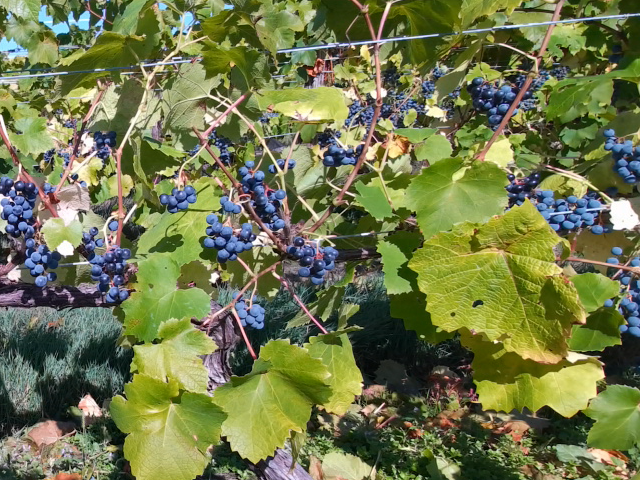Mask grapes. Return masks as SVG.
<instances>
[{
	"label": "grapes",
	"mask_w": 640,
	"mask_h": 480,
	"mask_svg": "<svg viewBox=\"0 0 640 480\" xmlns=\"http://www.w3.org/2000/svg\"><path fill=\"white\" fill-rule=\"evenodd\" d=\"M254 168V161H246L245 166L238 168V173L242 176L240 184L243 187V191L245 193L252 191L256 194L255 200H250L249 203L269 228L274 232L283 230L286 227V223L283 219H280L277 209L279 208V200L286 198V192L281 189H276L273 192L268 190L267 195H265L263 181L266 180V172L264 170H256L254 175L249 173Z\"/></svg>",
	"instance_id": "3"
},
{
	"label": "grapes",
	"mask_w": 640,
	"mask_h": 480,
	"mask_svg": "<svg viewBox=\"0 0 640 480\" xmlns=\"http://www.w3.org/2000/svg\"><path fill=\"white\" fill-rule=\"evenodd\" d=\"M602 135L607 138L603 149L611 151V156L616 161L613 171L618 173L627 185H635L640 181V146L635 145L631 139L618 143L613 128H605Z\"/></svg>",
	"instance_id": "8"
},
{
	"label": "grapes",
	"mask_w": 640,
	"mask_h": 480,
	"mask_svg": "<svg viewBox=\"0 0 640 480\" xmlns=\"http://www.w3.org/2000/svg\"><path fill=\"white\" fill-rule=\"evenodd\" d=\"M467 91L472 94L473 107L487 112L486 123L491 126V130L494 132L507 110L512 106L519 89L517 87L512 89L508 83H503L497 89L492 83L484 82L482 76H476L471 80Z\"/></svg>",
	"instance_id": "6"
},
{
	"label": "grapes",
	"mask_w": 640,
	"mask_h": 480,
	"mask_svg": "<svg viewBox=\"0 0 640 480\" xmlns=\"http://www.w3.org/2000/svg\"><path fill=\"white\" fill-rule=\"evenodd\" d=\"M509 184L505 186V190L509 193L508 205L513 207L515 205L521 206L526 198L532 196L539 202L536 205V209L541 212L545 217V220L550 224L554 231L572 230L576 227L592 226L590 232L594 235H603L604 233H610L612 226L610 224H595V219L599 216V212L585 213L584 209L593 206H603L605 201L599 199V194L588 189L586 194L580 199L575 195H570L567 199L562 198L557 201L555 193L552 190H540L537 189L532 193V187L540 181V175L537 172H532L530 175H525L523 181L519 185L516 184V176L509 174L507 176ZM576 203L574 213L571 215H559L550 216V211L557 210H569L571 209L569 204Z\"/></svg>",
	"instance_id": "2"
},
{
	"label": "grapes",
	"mask_w": 640,
	"mask_h": 480,
	"mask_svg": "<svg viewBox=\"0 0 640 480\" xmlns=\"http://www.w3.org/2000/svg\"><path fill=\"white\" fill-rule=\"evenodd\" d=\"M246 309L247 303L243 299H240L234 307L241 325L246 327L250 324L251 327L257 330L263 329L265 327L266 310L261 305H252L248 311Z\"/></svg>",
	"instance_id": "12"
},
{
	"label": "grapes",
	"mask_w": 640,
	"mask_h": 480,
	"mask_svg": "<svg viewBox=\"0 0 640 480\" xmlns=\"http://www.w3.org/2000/svg\"><path fill=\"white\" fill-rule=\"evenodd\" d=\"M116 132L108 131L107 134H102L100 131L94 133V139L96 143V149L101 150L104 145L114 147L116 145Z\"/></svg>",
	"instance_id": "14"
},
{
	"label": "grapes",
	"mask_w": 640,
	"mask_h": 480,
	"mask_svg": "<svg viewBox=\"0 0 640 480\" xmlns=\"http://www.w3.org/2000/svg\"><path fill=\"white\" fill-rule=\"evenodd\" d=\"M617 279L624 286L630 283L629 291L632 297V299L624 297L619 302V313L624 315V319L628 322V324H621L619 331L622 334H629L635 339H640V280L638 278L631 280V277L627 275L625 270L619 273Z\"/></svg>",
	"instance_id": "9"
},
{
	"label": "grapes",
	"mask_w": 640,
	"mask_h": 480,
	"mask_svg": "<svg viewBox=\"0 0 640 480\" xmlns=\"http://www.w3.org/2000/svg\"><path fill=\"white\" fill-rule=\"evenodd\" d=\"M38 186L24 181H16L8 176L0 177V194L5 199L0 201L3 210L0 212V218L7 221L4 226V232L10 234L12 238H18L22 232L24 234L25 256L24 265L26 269H30V276L35 277L34 284L37 287H44L47 282L56 281L58 275L54 271H49L47 275H43L48 268L54 270L57 268L62 256L58 251H48L45 244L39 245L36 249V241L33 237L35 234V220L33 218V210L35 202L38 198Z\"/></svg>",
	"instance_id": "1"
},
{
	"label": "grapes",
	"mask_w": 640,
	"mask_h": 480,
	"mask_svg": "<svg viewBox=\"0 0 640 480\" xmlns=\"http://www.w3.org/2000/svg\"><path fill=\"white\" fill-rule=\"evenodd\" d=\"M611 254L615 257H608L605 261L610 263H620V260L617 257H620L624 254V250L621 247H613L611 249Z\"/></svg>",
	"instance_id": "16"
},
{
	"label": "grapes",
	"mask_w": 640,
	"mask_h": 480,
	"mask_svg": "<svg viewBox=\"0 0 640 480\" xmlns=\"http://www.w3.org/2000/svg\"><path fill=\"white\" fill-rule=\"evenodd\" d=\"M206 223L209 226L205 230L207 237L204 239V247L207 249L216 248L218 250L216 258L219 262L235 261L237 253L251 250L252 242L257 239L254 226L250 222L241 224L239 237L232 235L233 229L231 227H223L215 214H208Z\"/></svg>",
	"instance_id": "4"
},
{
	"label": "grapes",
	"mask_w": 640,
	"mask_h": 480,
	"mask_svg": "<svg viewBox=\"0 0 640 480\" xmlns=\"http://www.w3.org/2000/svg\"><path fill=\"white\" fill-rule=\"evenodd\" d=\"M220 205L227 213L240 214L241 207L235 204L228 196H222L220 199Z\"/></svg>",
	"instance_id": "15"
},
{
	"label": "grapes",
	"mask_w": 640,
	"mask_h": 480,
	"mask_svg": "<svg viewBox=\"0 0 640 480\" xmlns=\"http://www.w3.org/2000/svg\"><path fill=\"white\" fill-rule=\"evenodd\" d=\"M319 252L323 253V259H314L316 249L311 245H305L304 239L301 237L294 238V246H288L285 249L286 254H292L299 259V265L302 266L297 271L298 277H311L314 285H320L324 282V275L327 271L335 269V261L339 256L338 250L333 246H324L319 248Z\"/></svg>",
	"instance_id": "7"
},
{
	"label": "grapes",
	"mask_w": 640,
	"mask_h": 480,
	"mask_svg": "<svg viewBox=\"0 0 640 480\" xmlns=\"http://www.w3.org/2000/svg\"><path fill=\"white\" fill-rule=\"evenodd\" d=\"M99 234V229L96 227H90L88 233L86 231L82 232V243L85 244L84 248L88 249L89 252H93L96 248H100L104 246V240L102 238L93 239Z\"/></svg>",
	"instance_id": "13"
},
{
	"label": "grapes",
	"mask_w": 640,
	"mask_h": 480,
	"mask_svg": "<svg viewBox=\"0 0 640 480\" xmlns=\"http://www.w3.org/2000/svg\"><path fill=\"white\" fill-rule=\"evenodd\" d=\"M364 145V143H361L356 145L354 149H347L345 151L341 146L329 144L323 153L321 164L324 167H341L344 165L354 166Z\"/></svg>",
	"instance_id": "11"
},
{
	"label": "grapes",
	"mask_w": 640,
	"mask_h": 480,
	"mask_svg": "<svg viewBox=\"0 0 640 480\" xmlns=\"http://www.w3.org/2000/svg\"><path fill=\"white\" fill-rule=\"evenodd\" d=\"M132 256V251L129 248L119 247L118 244L110 246V251L104 255H97L91 253L88 257L91 268V279L98 281L97 290L109 293L106 295L108 303H113L118 299L120 301H127L129 299V292L126 290L120 291L119 286L124 285V278L122 275L113 276L114 286L109 290V284L111 283V275L106 273L107 270L111 272H121L123 267L127 266V260Z\"/></svg>",
	"instance_id": "5"
},
{
	"label": "grapes",
	"mask_w": 640,
	"mask_h": 480,
	"mask_svg": "<svg viewBox=\"0 0 640 480\" xmlns=\"http://www.w3.org/2000/svg\"><path fill=\"white\" fill-rule=\"evenodd\" d=\"M276 162H277V164H278V166H279V168L281 170L285 169V164L287 163L286 159H277ZM295 166H296V160L295 159H289L288 163H287V168L288 169H294Z\"/></svg>",
	"instance_id": "17"
},
{
	"label": "grapes",
	"mask_w": 640,
	"mask_h": 480,
	"mask_svg": "<svg viewBox=\"0 0 640 480\" xmlns=\"http://www.w3.org/2000/svg\"><path fill=\"white\" fill-rule=\"evenodd\" d=\"M171 194L172 195L162 192L159 196V203L161 205H168V212L170 214L185 211L188 209L189 204H195L197 202V189L194 185H186L183 191L178 190L177 187H172Z\"/></svg>",
	"instance_id": "10"
}]
</instances>
